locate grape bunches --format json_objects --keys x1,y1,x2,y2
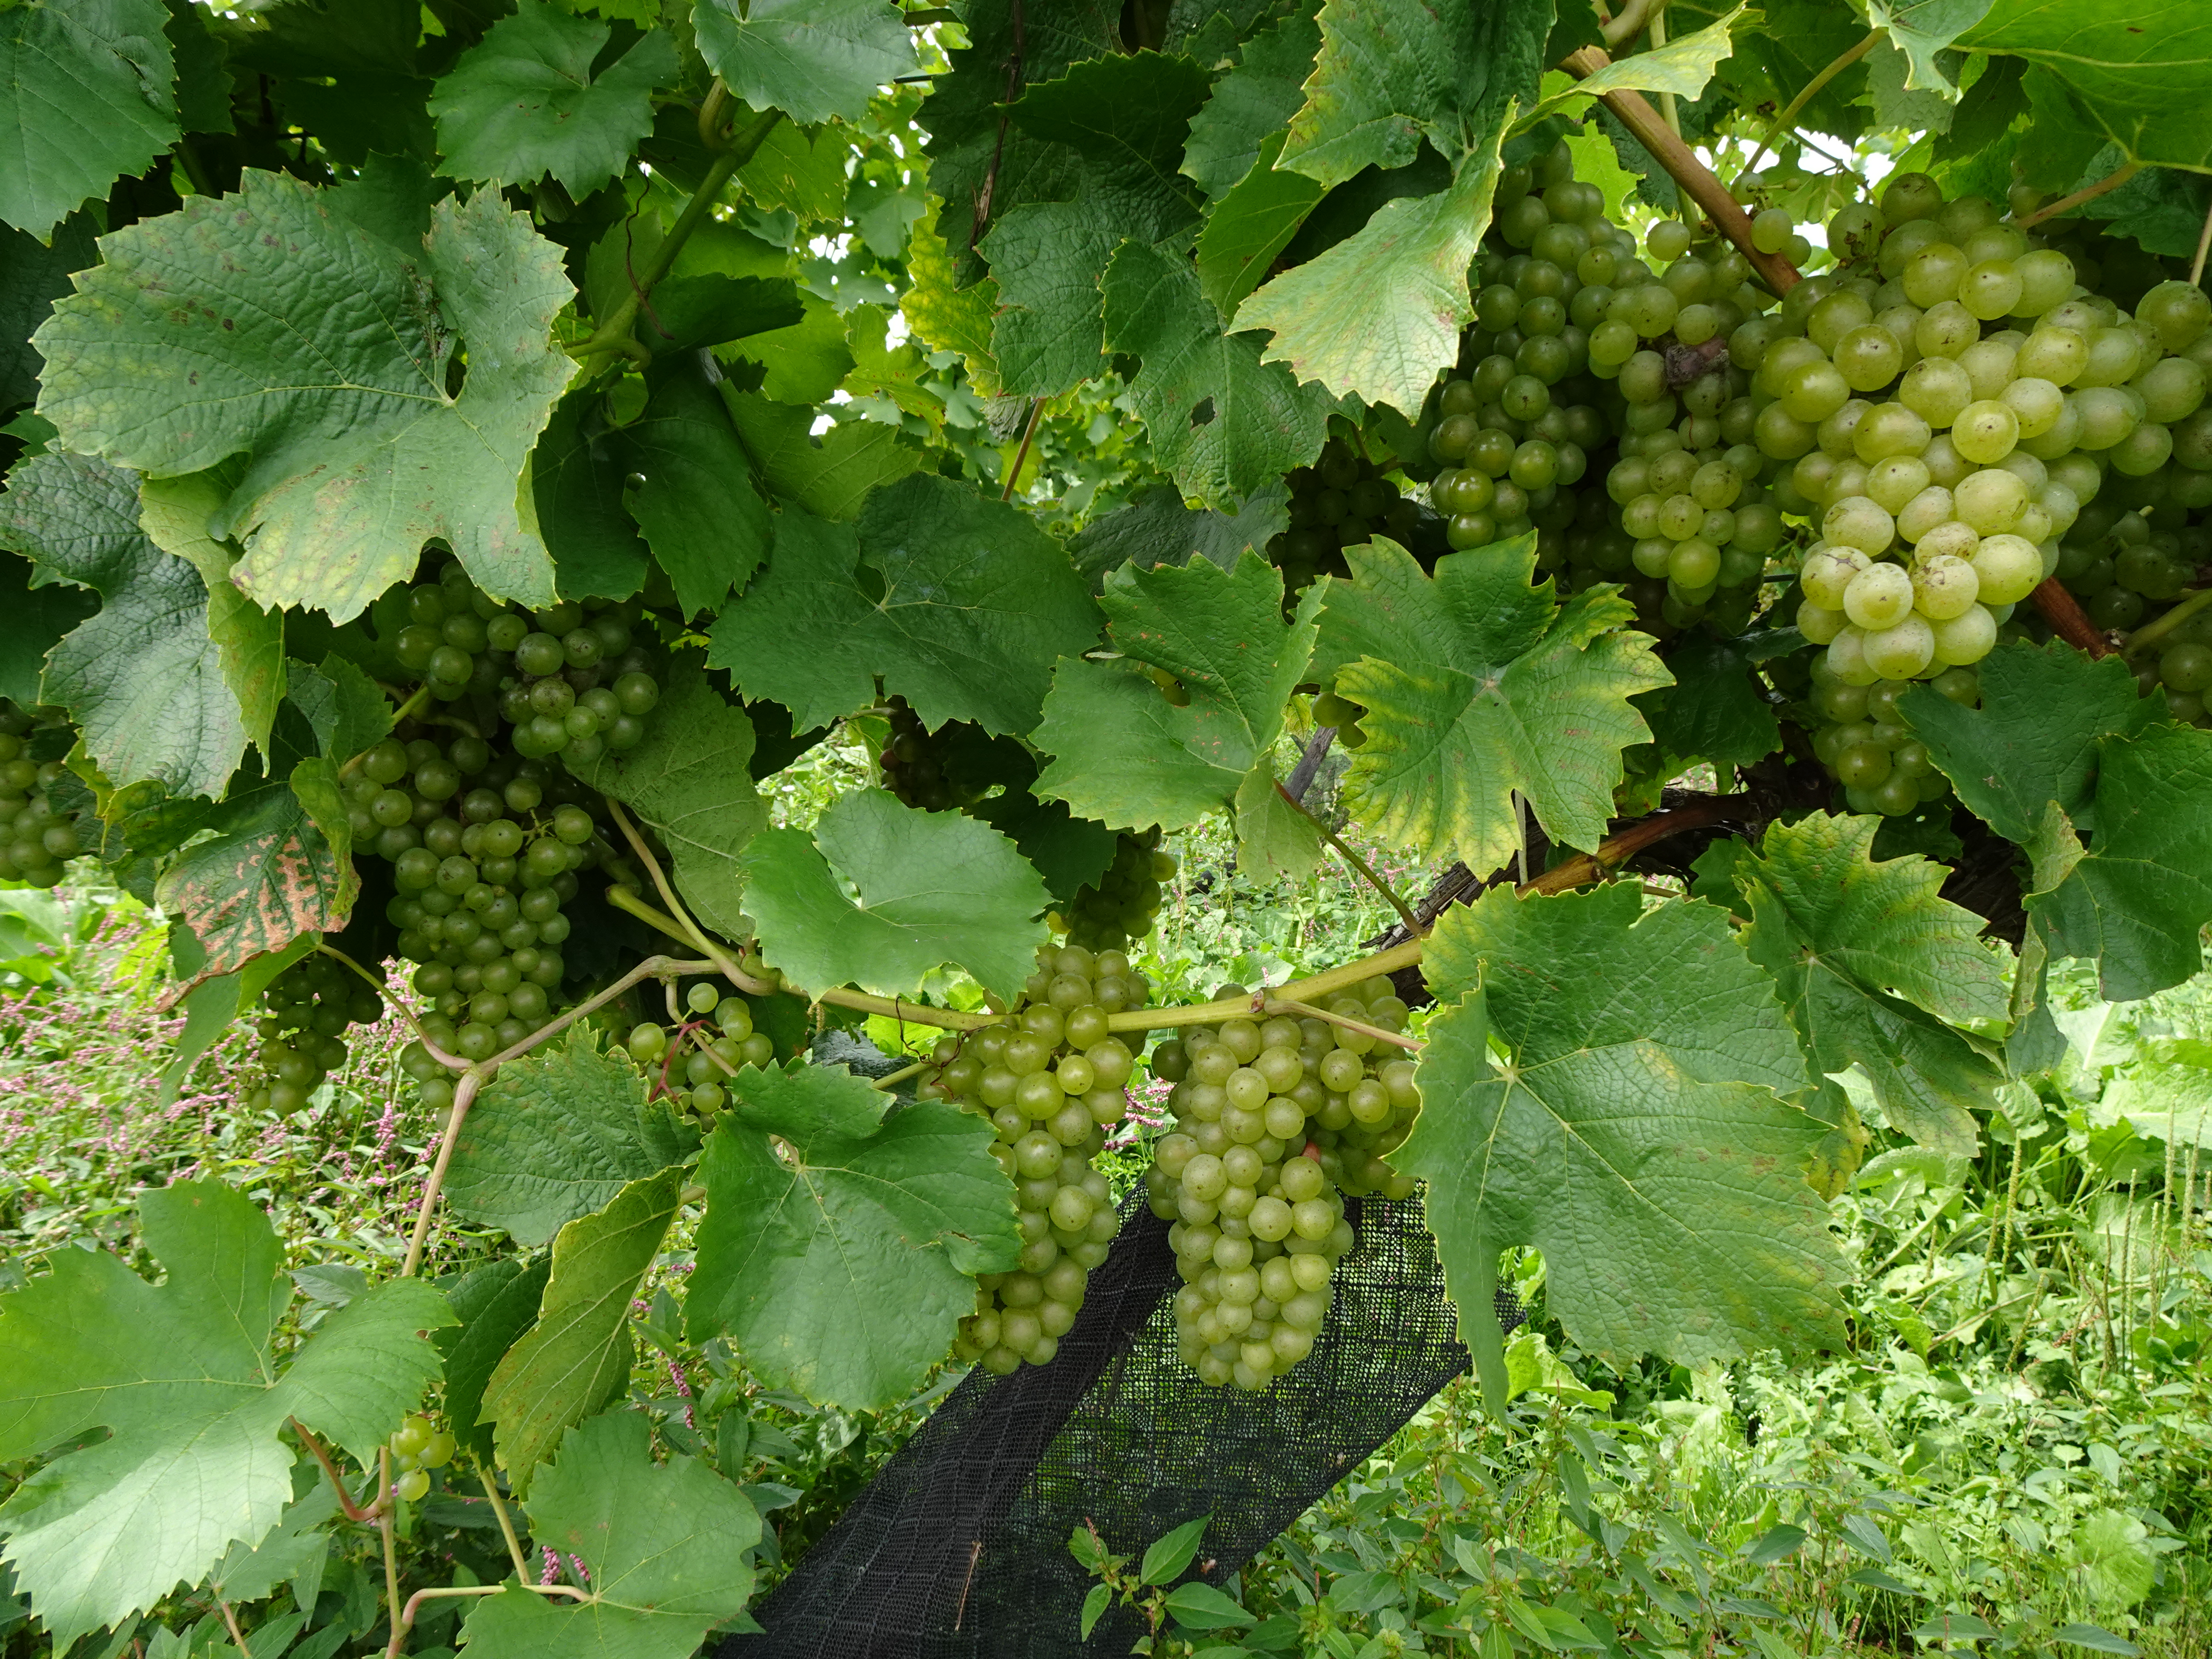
[
  {"x1": 319, "y1": 699, "x2": 489, "y2": 864},
  {"x1": 2004, "y1": 150, "x2": 2173, "y2": 319},
  {"x1": 386, "y1": 759, "x2": 615, "y2": 1132},
  {"x1": 2108, "y1": 279, "x2": 2212, "y2": 475},
  {"x1": 498, "y1": 594, "x2": 659, "y2": 766},
  {"x1": 915, "y1": 943, "x2": 1146, "y2": 1377},
  {"x1": 628, "y1": 982, "x2": 773, "y2": 1134},
  {"x1": 1277, "y1": 963, "x2": 1420, "y2": 1200},
  {"x1": 1148, "y1": 982, "x2": 1354, "y2": 1387},
  {"x1": 1428, "y1": 134, "x2": 1650, "y2": 551},
  {"x1": 1589, "y1": 209, "x2": 1811, "y2": 641},
  {"x1": 632, "y1": 830, "x2": 708, "y2": 960},
  {"x1": 1525, "y1": 369, "x2": 1683, "y2": 643},
  {"x1": 237, "y1": 954, "x2": 386, "y2": 1115},
  {"x1": 1046, "y1": 823, "x2": 1185, "y2": 956},
  {"x1": 1751, "y1": 173, "x2": 2161, "y2": 685},
  {"x1": 1266, "y1": 438, "x2": 1420, "y2": 624},
  {"x1": 2054, "y1": 456, "x2": 2212, "y2": 724},
  {"x1": 0, "y1": 696, "x2": 84, "y2": 887},
  {"x1": 1312, "y1": 693, "x2": 1368, "y2": 746},
  {"x1": 395, "y1": 557, "x2": 529, "y2": 703},
  {"x1": 388, "y1": 1411, "x2": 456, "y2": 1502},
  {"x1": 1810, "y1": 595, "x2": 2054, "y2": 815},
  {"x1": 879, "y1": 694, "x2": 964, "y2": 812}
]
